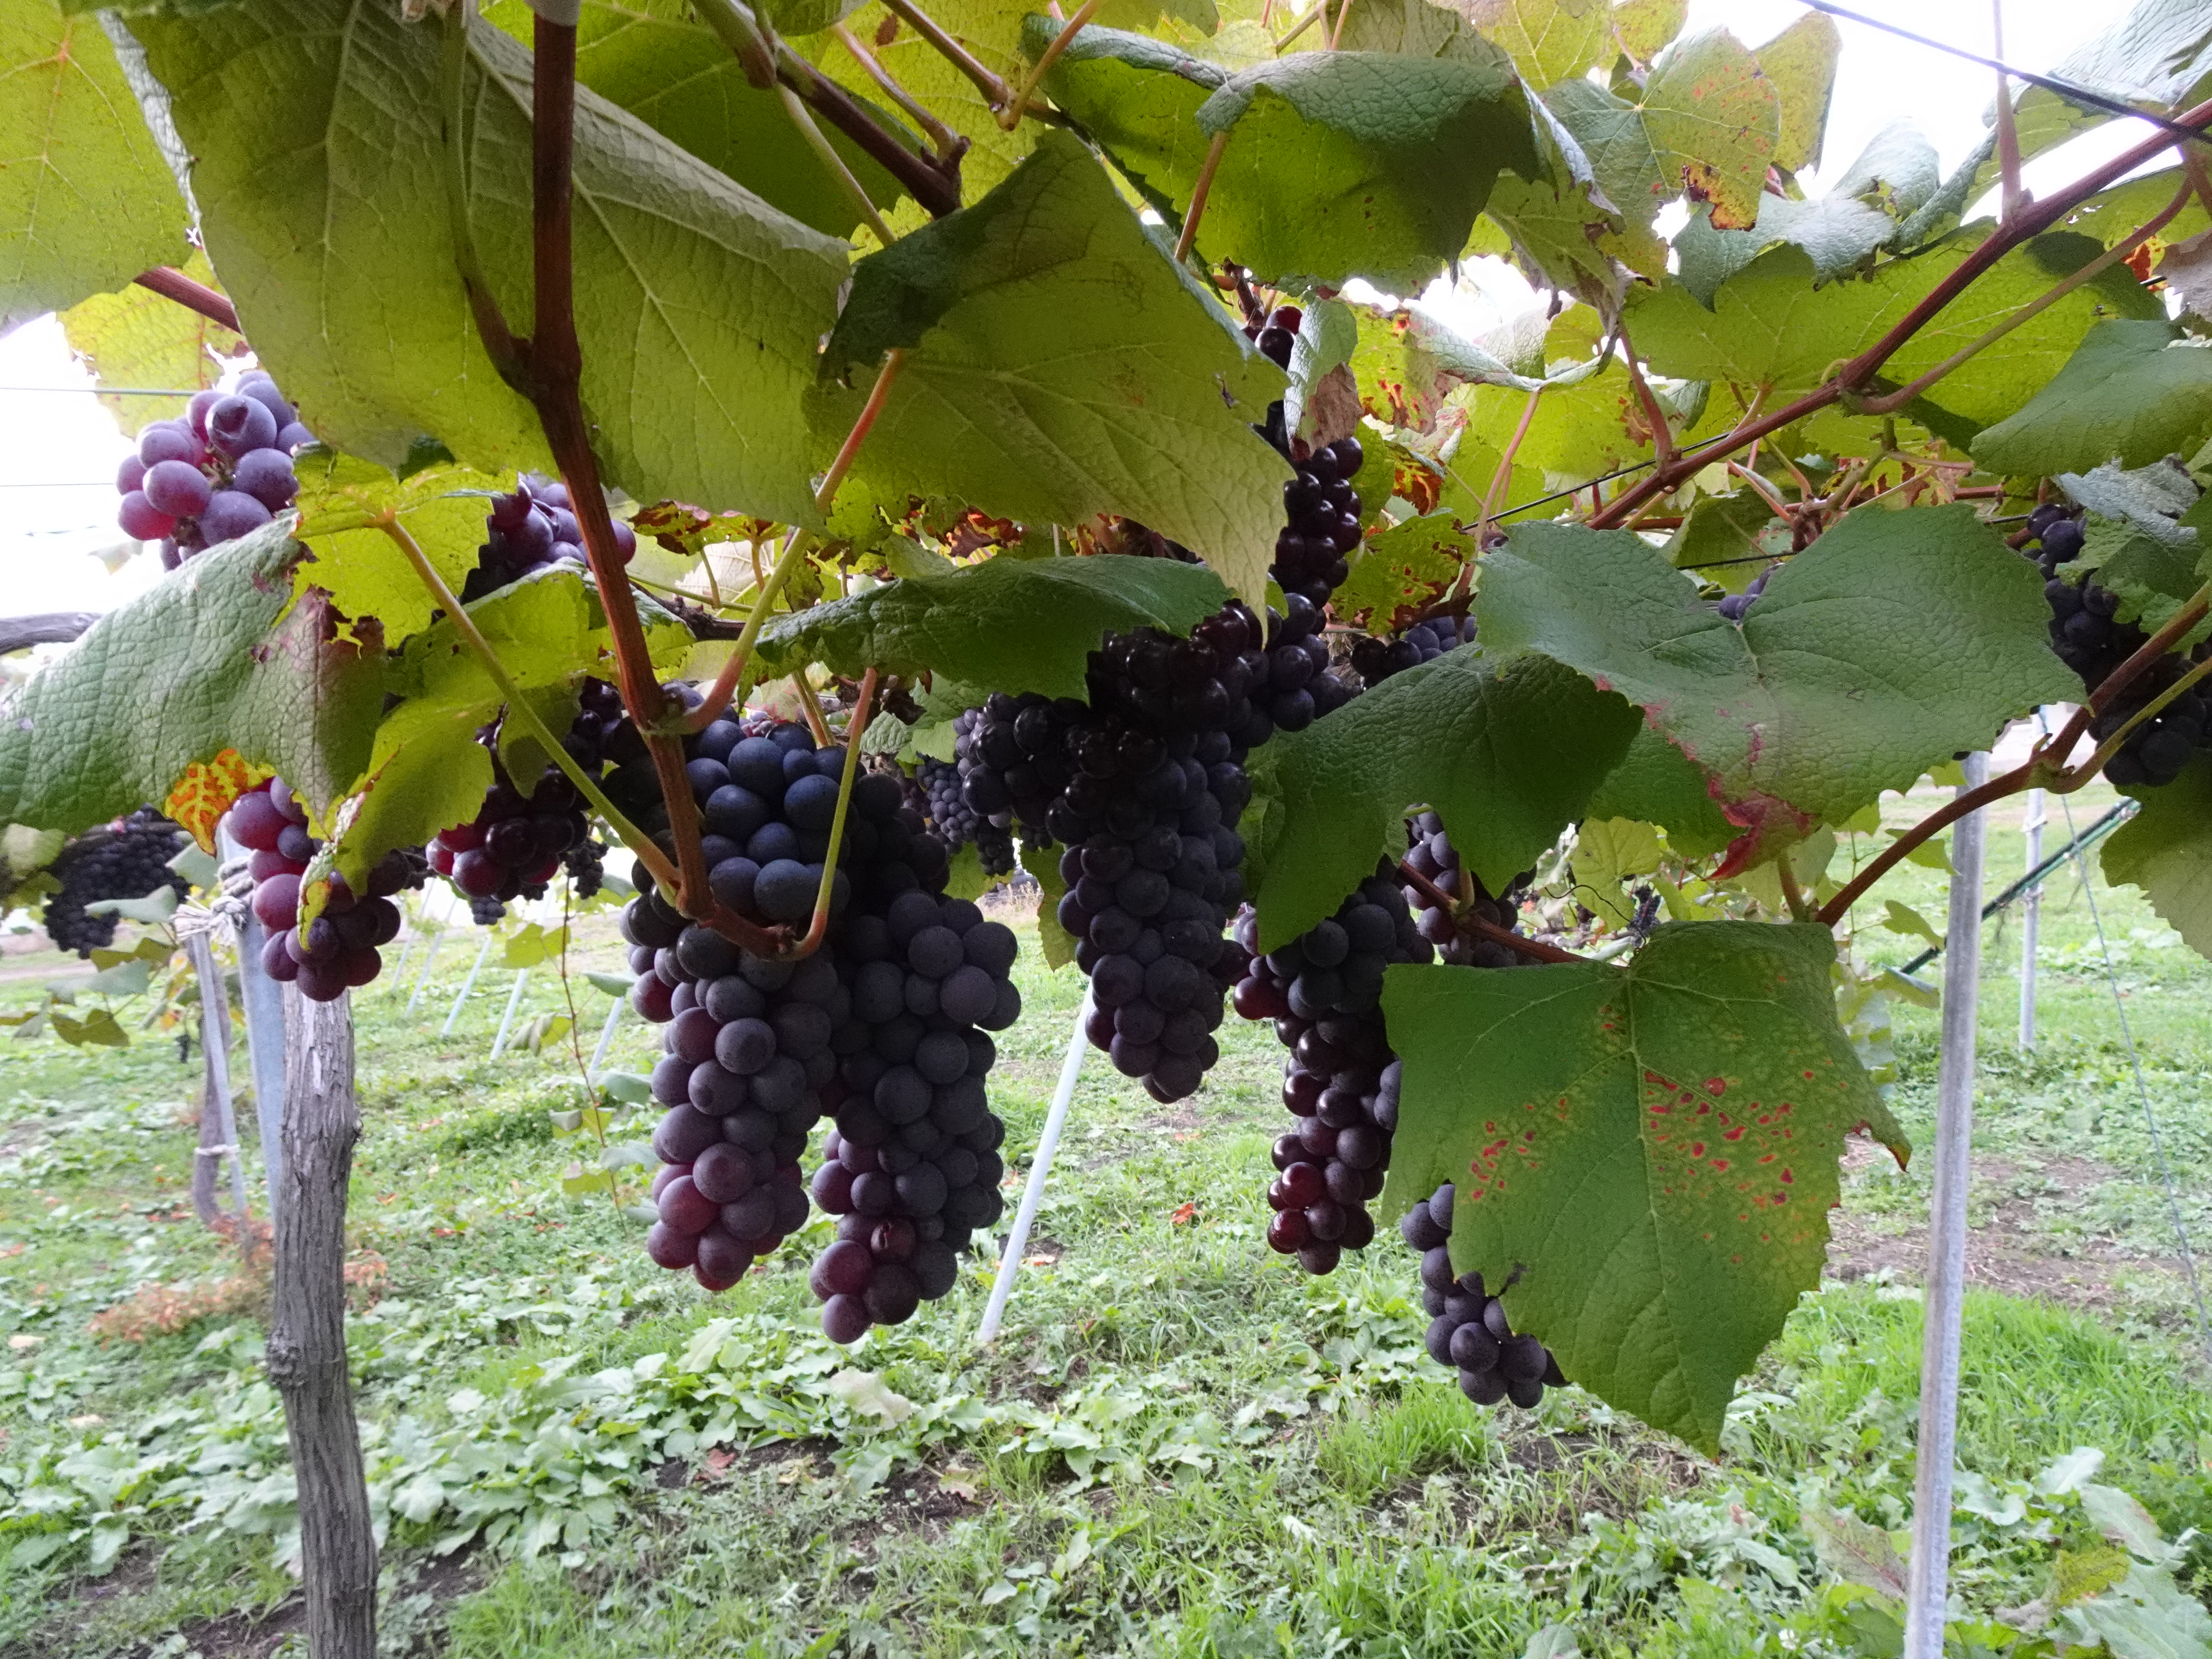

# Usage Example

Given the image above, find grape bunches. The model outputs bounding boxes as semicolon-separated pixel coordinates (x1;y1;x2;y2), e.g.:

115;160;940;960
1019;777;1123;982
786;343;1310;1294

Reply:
1266;853;1419;1023
459;469;636;606
609;892;849;1292
227;771;412;1002
961;599;1271;1106
1243;306;1361;604
116;367;312;570
1350;615;1480;688
1261;591;1348;729
2020;507;2204;791
1373;1057;1573;1409
1713;559;1796;625
607;683;952;976
811;895;1021;1343
1227;910;1411;1276
425;676;623;898
42;803;190;965
1400;802;1536;969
